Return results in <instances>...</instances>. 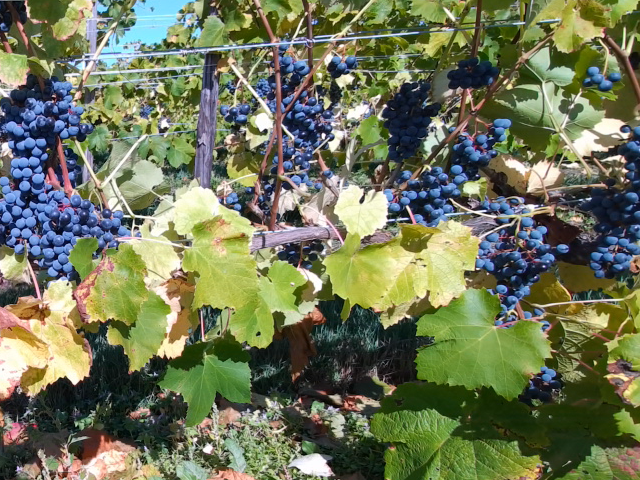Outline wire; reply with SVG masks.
<instances>
[{
  "instance_id": "wire-3",
  "label": "wire",
  "mask_w": 640,
  "mask_h": 480,
  "mask_svg": "<svg viewBox=\"0 0 640 480\" xmlns=\"http://www.w3.org/2000/svg\"><path fill=\"white\" fill-rule=\"evenodd\" d=\"M545 206H546L545 202L533 203V204H520V205H516L514 207V210L518 211L522 209H536V208H543Z\"/></svg>"
},
{
  "instance_id": "wire-2",
  "label": "wire",
  "mask_w": 640,
  "mask_h": 480,
  "mask_svg": "<svg viewBox=\"0 0 640 480\" xmlns=\"http://www.w3.org/2000/svg\"><path fill=\"white\" fill-rule=\"evenodd\" d=\"M304 226L300 225V226H296V227H287V228H282V229H274V230H256L253 232V235H272V234H280V233H287V232H292V231H300L303 230Z\"/></svg>"
},
{
  "instance_id": "wire-1",
  "label": "wire",
  "mask_w": 640,
  "mask_h": 480,
  "mask_svg": "<svg viewBox=\"0 0 640 480\" xmlns=\"http://www.w3.org/2000/svg\"><path fill=\"white\" fill-rule=\"evenodd\" d=\"M528 24H529L528 20H515L510 22L478 24V25H472V26L442 27V28L419 29V30H412V31H395V32L364 34V35H356V36L349 35L346 37L297 38V39H289L284 41H272V42H263V43L221 45V46H217L214 48H207V49H181V50H175V51L118 53V54H111L108 56H98V57H69V58L58 59L56 61V64L61 65V64L72 63V62L111 61L112 59H121V58L177 56V55H183V54H209V53H216L223 50L266 48V47H274V46H286V45L299 44V43H332V42H348V41L355 42V41L366 40V39H378V38L397 37V36H414V35H421V34H433V33H444V32L474 31V30H480V29L503 28V27H512L517 25H528Z\"/></svg>"
}]
</instances>
